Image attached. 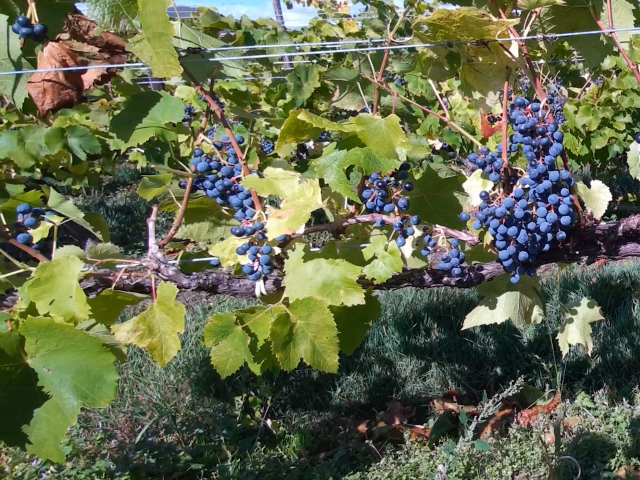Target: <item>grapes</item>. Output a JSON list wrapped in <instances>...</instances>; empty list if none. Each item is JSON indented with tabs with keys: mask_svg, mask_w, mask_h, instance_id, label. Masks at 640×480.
Masks as SVG:
<instances>
[{
	"mask_svg": "<svg viewBox=\"0 0 640 480\" xmlns=\"http://www.w3.org/2000/svg\"><path fill=\"white\" fill-rule=\"evenodd\" d=\"M226 142L225 150L230 154L226 158V164L222 166L220 158L216 157L215 161H211L203 149H194L193 157L190 165L196 167L199 174H208L212 170L219 171L220 177L216 174L199 175L192 183V193L203 190L208 198L215 200L217 205L229 204L236 210L234 220L241 222L242 219L250 221L255 215V210L247 207L253 206L251 197L252 190L243 188L239 183H234L231 178L236 177L240 173V163L236 156L232 143L228 137H221L220 141H215L214 145L218 150H222Z\"/></svg>",
	"mask_w": 640,
	"mask_h": 480,
	"instance_id": "2",
	"label": "grapes"
},
{
	"mask_svg": "<svg viewBox=\"0 0 640 480\" xmlns=\"http://www.w3.org/2000/svg\"><path fill=\"white\" fill-rule=\"evenodd\" d=\"M264 229V224L262 222H256L253 227L251 226H239V227H232L230 229V233L234 236V237H243L245 236H252L254 233L256 232H260ZM257 239H262V240H267L268 236L264 233V232H260L256 235Z\"/></svg>",
	"mask_w": 640,
	"mask_h": 480,
	"instance_id": "10",
	"label": "grapes"
},
{
	"mask_svg": "<svg viewBox=\"0 0 640 480\" xmlns=\"http://www.w3.org/2000/svg\"><path fill=\"white\" fill-rule=\"evenodd\" d=\"M16 220L22 222L12 224L14 228L27 227L36 229L38 227V219L41 215L56 216L57 212L52 210H43L41 207H34L29 203H22L15 207Z\"/></svg>",
	"mask_w": 640,
	"mask_h": 480,
	"instance_id": "6",
	"label": "grapes"
},
{
	"mask_svg": "<svg viewBox=\"0 0 640 480\" xmlns=\"http://www.w3.org/2000/svg\"><path fill=\"white\" fill-rule=\"evenodd\" d=\"M465 260L466 254L464 252L459 249H452L449 255L443 254L441 256V261L437 263V268L446 269L451 275H460L462 270L458 266L464 263Z\"/></svg>",
	"mask_w": 640,
	"mask_h": 480,
	"instance_id": "8",
	"label": "grapes"
},
{
	"mask_svg": "<svg viewBox=\"0 0 640 480\" xmlns=\"http://www.w3.org/2000/svg\"><path fill=\"white\" fill-rule=\"evenodd\" d=\"M541 101L533 102L528 97H516L508 108V120L514 122L510 136L511 143L507 150V158L518 151L516 144L523 143V153L529 161L527 176L511 175L507 181L509 186H528L529 201L536 205V215L528 210V200L524 198L522 188H514L512 197H505L503 205L491 207V198L487 191H481V204L472 212L477 221L471 223L473 230H481L483 223L488 226L489 233L494 236L493 246L498 252V259L505 270L512 274L511 284H519L525 274L522 265H515V260L535 263L539 252L547 253L554 240L553 225L561 226L572 223L574 213L573 199L568 188H562L560 195L550 193L552 184L566 181L574 186L576 179L568 170L556 171V158L564 151V133L558 130L556 122H541L538 115ZM512 216L505 218V225H500V218L512 210Z\"/></svg>",
	"mask_w": 640,
	"mask_h": 480,
	"instance_id": "1",
	"label": "grapes"
},
{
	"mask_svg": "<svg viewBox=\"0 0 640 480\" xmlns=\"http://www.w3.org/2000/svg\"><path fill=\"white\" fill-rule=\"evenodd\" d=\"M247 251H249V260L251 262H255L257 259V253L259 252V248L257 246H253L252 242L243 243L242 245L236 248L237 255H246Z\"/></svg>",
	"mask_w": 640,
	"mask_h": 480,
	"instance_id": "11",
	"label": "grapes"
},
{
	"mask_svg": "<svg viewBox=\"0 0 640 480\" xmlns=\"http://www.w3.org/2000/svg\"><path fill=\"white\" fill-rule=\"evenodd\" d=\"M422 241L425 242L429 248H433L436 245V240L434 238H432L431 235H425L422 238ZM429 248H421L420 249V256L422 258H427L430 255V249Z\"/></svg>",
	"mask_w": 640,
	"mask_h": 480,
	"instance_id": "12",
	"label": "grapes"
},
{
	"mask_svg": "<svg viewBox=\"0 0 640 480\" xmlns=\"http://www.w3.org/2000/svg\"><path fill=\"white\" fill-rule=\"evenodd\" d=\"M410 170L409 163H402L399 168L391 173L393 181L389 176H384L383 179H378L379 174L372 172L368 175V180L374 184L376 188L375 198L373 201H365L364 206L367 210L382 211L383 213L390 214L397 206L400 211L410 210V200L407 198H398L395 203H386L388 197L387 184L390 187H397L398 180L406 181L408 178V171Z\"/></svg>",
	"mask_w": 640,
	"mask_h": 480,
	"instance_id": "3",
	"label": "grapes"
},
{
	"mask_svg": "<svg viewBox=\"0 0 640 480\" xmlns=\"http://www.w3.org/2000/svg\"><path fill=\"white\" fill-rule=\"evenodd\" d=\"M502 153V143L497 145V152H492L488 147H483L478 153H470L467 161L477 169H481L484 174H488L490 182H497L500 179V170L503 163L499 154Z\"/></svg>",
	"mask_w": 640,
	"mask_h": 480,
	"instance_id": "4",
	"label": "grapes"
},
{
	"mask_svg": "<svg viewBox=\"0 0 640 480\" xmlns=\"http://www.w3.org/2000/svg\"><path fill=\"white\" fill-rule=\"evenodd\" d=\"M407 222H408V217L403 216L399 218L398 222H395L392 225V229L394 231L399 232V235H400L395 239V245L397 248L405 247L406 239H408L409 236H413L415 234V230L413 227H407L406 230H403V226L406 225Z\"/></svg>",
	"mask_w": 640,
	"mask_h": 480,
	"instance_id": "9",
	"label": "grapes"
},
{
	"mask_svg": "<svg viewBox=\"0 0 640 480\" xmlns=\"http://www.w3.org/2000/svg\"><path fill=\"white\" fill-rule=\"evenodd\" d=\"M11 32L24 39H32L41 43L49 32V27L44 23L31 24L26 16H18L11 26Z\"/></svg>",
	"mask_w": 640,
	"mask_h": 480,
	"instance_id": "5",
	"label": "grapes"
},
{
	"mask_svg": "<svg viewBox=\"0 0 640 480\" xmlns=\"http://www.w3.org/2000/svg\"><path fill=\"white\" fill-rule=\"evenodd\" d=\"M260 252L262 256L258 257V263L260 266H262V272L259 270L254 271V267L250 263L242 265V273L246 276H249V279L253 282L259 281L262 278V274L269 275L273 271V265L270 256L272 247L270 245H263L260 249Z\"/></svg>",
	"mask_w": 640,
	"mask_h": 480,
	"instance_id": "7",
	"label": "grapes"
}]
</instances>
